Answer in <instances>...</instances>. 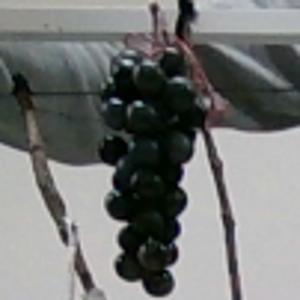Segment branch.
Masks as SVG:
<instances>
[{"mask_svg": "<svg viewBox=\"0 0 300 300\" xmlns=\"http://www.w3.org/2000/svg\"><path fill=\"white\" fill-rule=\"evenodd\" d=\"M13 84L11 95L20 108L25 129V138L32 162V172L38 192L45 209L55 224L59 240L65 247L72 262V270L79 279V285L89 300H108L106 290L99 288L89 271L88 263L82 253L78 237L75 235L68 216L66 202L59 192L51 168L47 163L44 145L35 119L33 94L28 78L20 71L11 73Z\"/></svg>", "mask_w": 300, "mask_h": 300, "instance_id": "30e6481e", "label": "branch"}, {"mask_svg": "<svg viewBox=\"0 0 300 300\" xmlns=\"http://www.w3.org/2000/svg\"><path fill=\"white\" fill-rule=\"evenodd\" d=\"M204 147L207 152L208 166L214 183L218 201L219 217L225 238L226 264L228 269V286L230 288V300H244L242 293V280L239 274L238 251L236 246L237 223L228 194L224 177V161L219 154L213 133L210 129V121L204 122L200 128Z\"/></svg>", "mask_w": 300, "mask_h": 300, "instance_id": "325d2c04", "label": "branch"}, {"mask_svg": "<svg viewBox=\"0 0 300 300\" xmlns=\"http://www.w3.org/2000/svg\"><path fill=\"white\" fill-rule=\"evenodd\" d=\"M178 16L174 24V40L176 44L185 48L188 61L191 68L192 78L197 82L200 88L198 72L188 50V41L192 37V25L200 17V13L196 7V0H177Z\"/></svg>", "mask_w": 300, "mask_h": 300, "instance_id": "170604dd", "label": "branch"}]
</instances>
